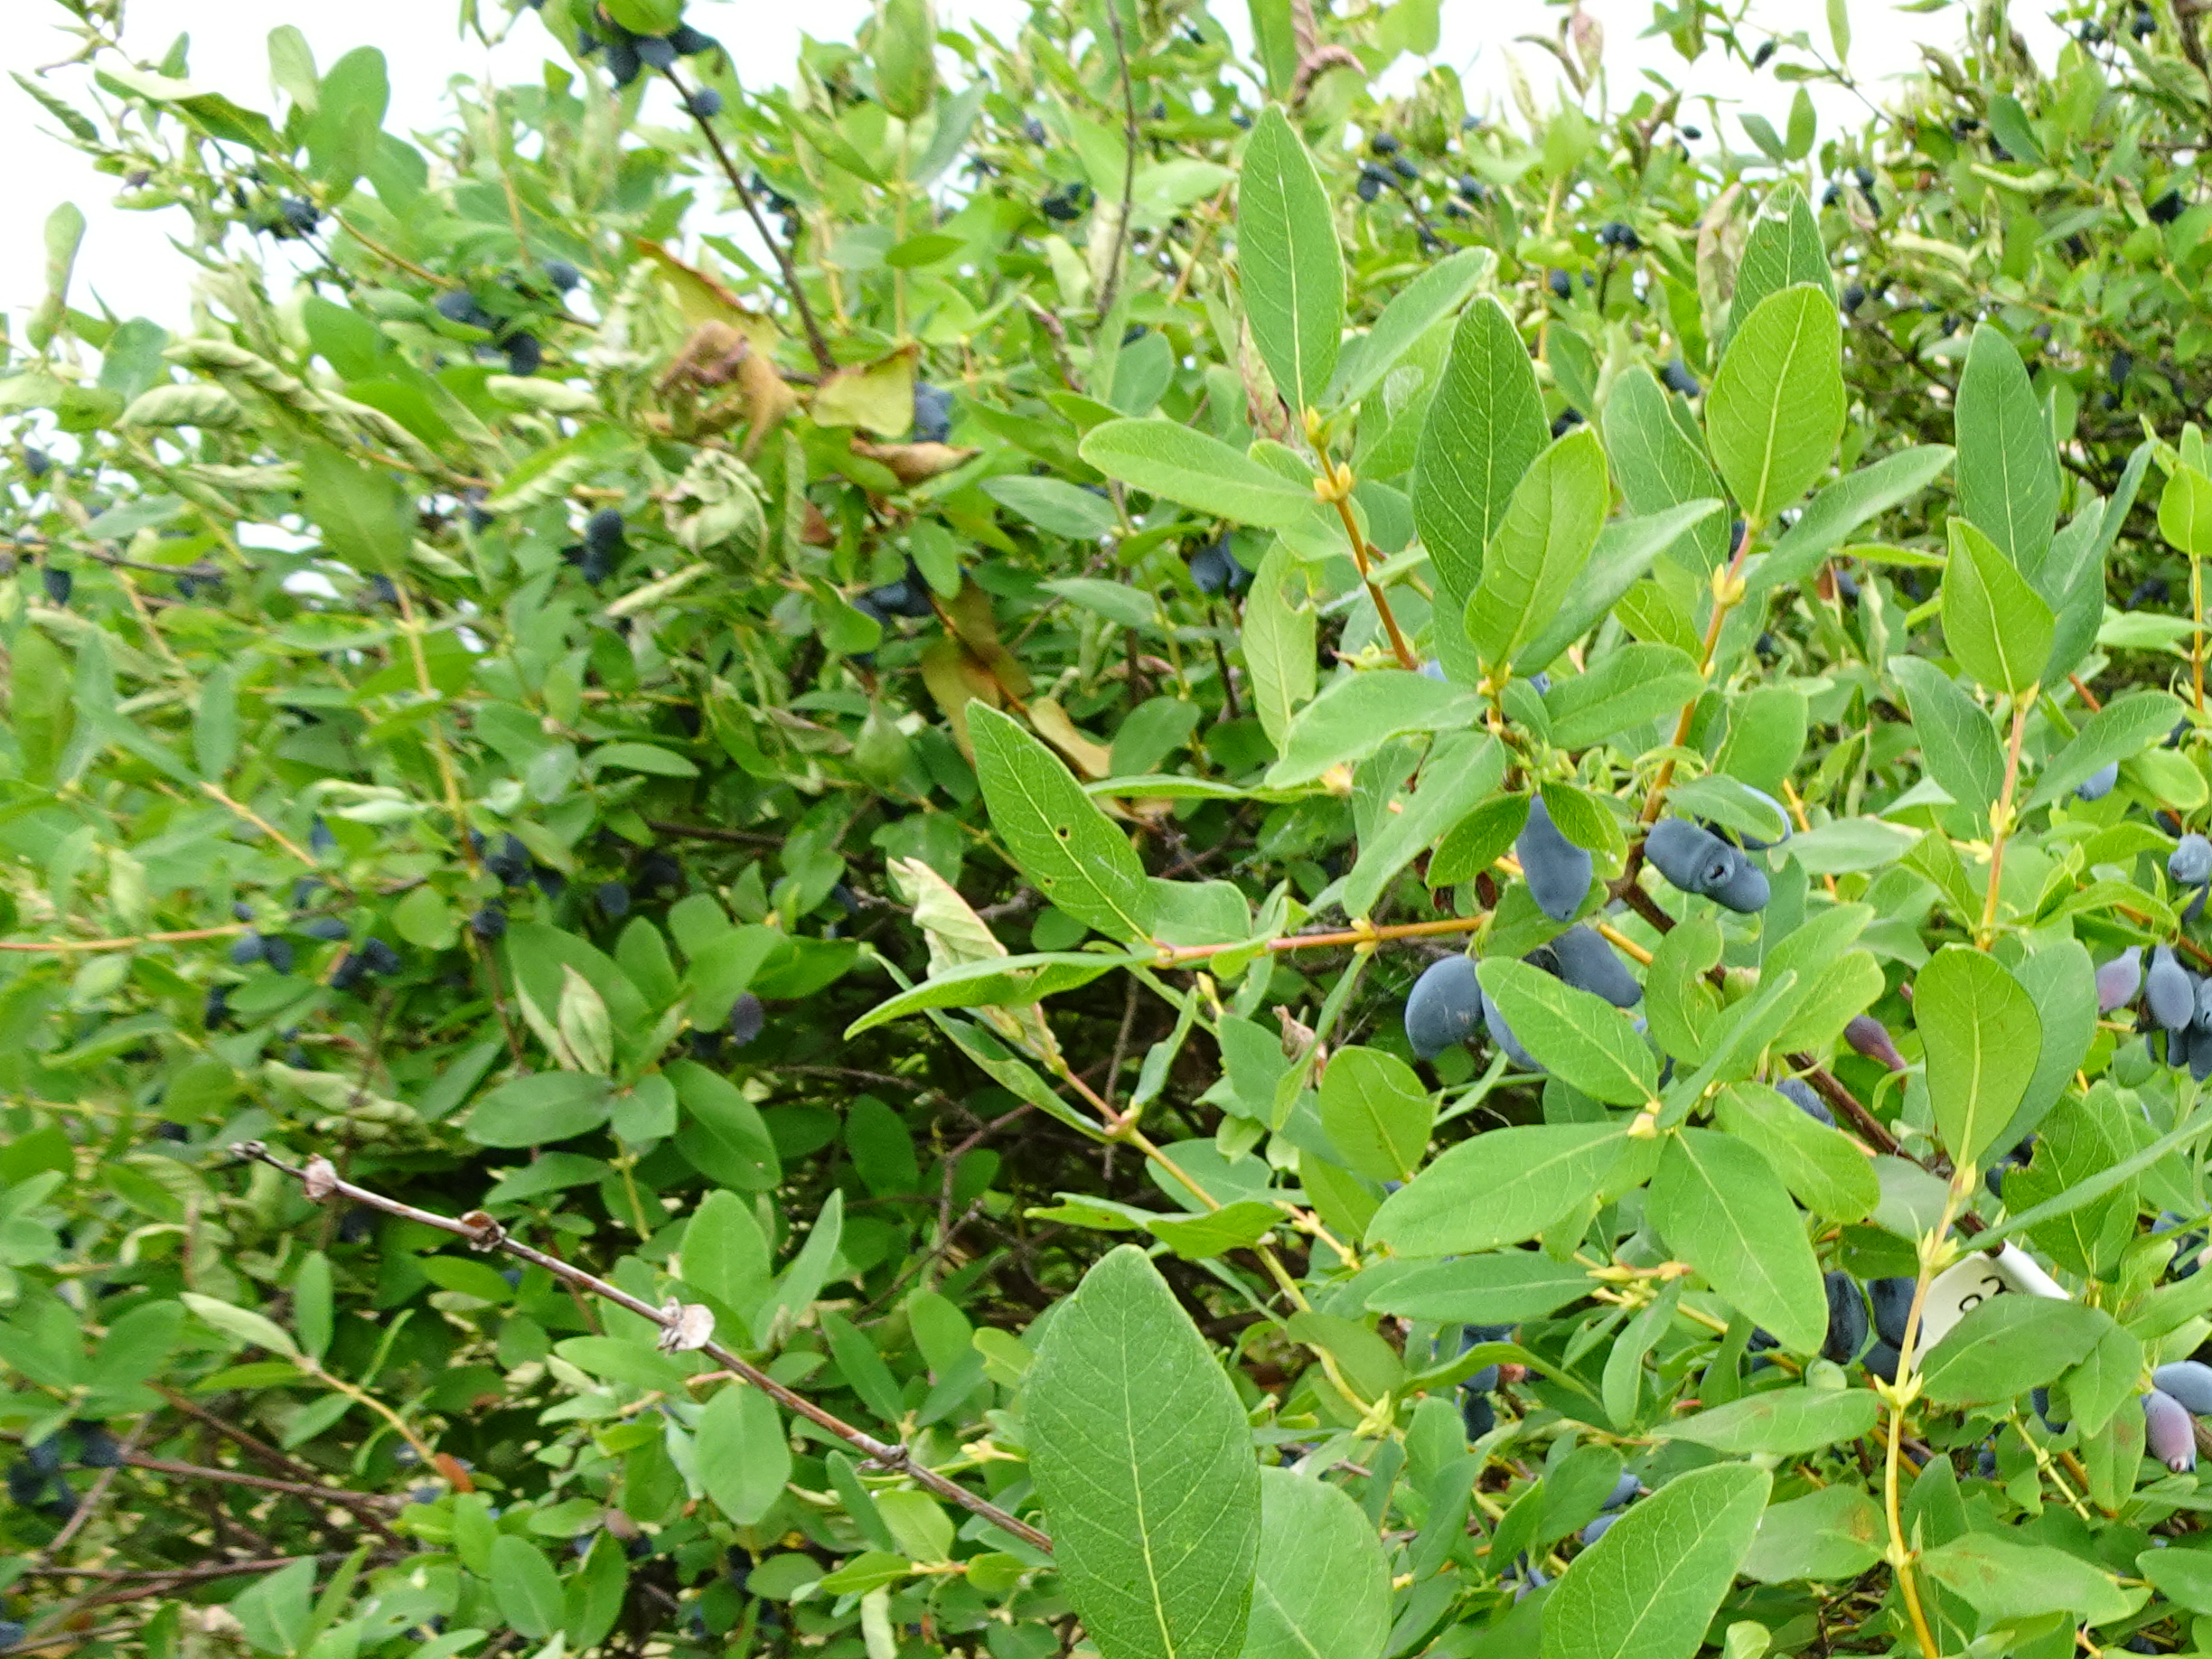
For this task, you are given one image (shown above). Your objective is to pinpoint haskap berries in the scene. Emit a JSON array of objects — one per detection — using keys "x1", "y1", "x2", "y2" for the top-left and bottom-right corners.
[
  {"x1": 1980, "y1": 1435, "x2": 2002, "y2": 1473},
  {"x1": 2101, "y1": 395, "x2": 2120, "y2": 411},
  {"x1": 1602, "y1": 220, "x2": 1621, "y2": 242},
  {"x1": 1859, "y1": 167, "x2": 1875, "y2": 184},
  {"x1": 598, "y1": 883, "x2": 629, "y2": 913},
  {"x1": 1806, "y1": 1358, "x2": 1848, "y2": 1395},
  {"x1": 1388, "y1": 154, "x2": 1417, "y2": 176},
  {"x1": 1926, "y1": 302, "x2": 1941, "y2": 313},
  {"x1": 1619, "y1": 228, "x2": 1640, "y2": 249},
  {"x1": 277, "y1": 202, "x2": 322, "y2": 234},
  {"x1": 1458, "y1": 1323, "x2": 1498, "y2": 1392},
  {"x1": 346, "y1": 1206, "x2": 367, "y2": 1236},
  {"x1": 2184, "y1": 887, "x2": 2210, "y2": 922},
  {"x1": 2110, "y1": 353, "x2": 2126, "y2": 381},
  {"x1": 854, "y1": 600, "x2": 879, "y2": 661},
  {"x1": 1219, "y1": 538, "x2": 1245, "y2": 585},
  {"x1": 472, "y1": 905, "x2": 505, "y2": 936},
  {"x1": 487, "y1": 838, "x2": 526, "y2": 874},
  {"x1": 914, "y1": 395, "x2": 953, "y2": 440},
  {"x1": 78, "y1": 1425, "x2": 129, "y2": 1468},
  {"x1": 1527, "y1": 1568, "x2": 1550, "y2": 1588},
  {"x1": 435, "y1": 293, "x2": 473, "y2": 321},
  {"x1": 1503, "y1": 1554, "x2": 1527, "y2": 1577},
  {"x1": 471, "y1": 831, "x2": 484, "y2": 842},
  {"x1": 2150, "y1": 191, "x2": 2179, "y2": 222},
  {"x1": 1488, "y1": 1467, "x2": 1511, "y2": 1489},
  {"x1": 1423, "y1": 661, "x2": 1446, "y2": 681},
  {"x1": 1942, "y1": 314, "x2": 1960, "y2": 336},
  {"x1": 512, "y1": 869, "x2": 562, "y2": 894},
  {"x1": 1048, "y1": 184, "x2": 1098, "y2": 216},
  {"x1": 1459, "y1": 177, "x2": 1481, "y2": 194},
  {"x1": 1670, "y1": 362, "x2": 1699, "y2": 397},
  {"x1": 2195, "y1": 978, "x2": 2212, "y2": 1038},
  {"x1": 1731, "y1": 519, "x2": 1746, "y2": 550},
  {"x1": 2147, "y1": 941, "x2": 2190, "y2": 1033},
  {"x1": 1527, "y1": 944, "x2": 1561, "y2": 970},
  {"x1": 94, "y1": 1284, "x2": 130, "y2": 1299},
  {"x1": 635, "y1": 37, "x2": 678, "y2": 66},
  {"x1": 2180, "y1": 1231, "x2": 2207, "y2": 1278},
  {"x1": 286, "y1": 1048, "x2": 309, "y2": 1068},
  {"x1": 1121, "y1": 324, "x2": 1149, "y2": 344},
  {"x1": 901, "y1": 583, "x2": 936, "y2": 618},
  {"x1": 503, "y1": 1268, "x2": 521, "y2": 1286},
  {"x1": 2149, "y1": 1363, "x2": 2212, "y2": 1411},
  {"x1": 1582, "y1": 274, "x2": 1592, "y2": 285},
  {"x1": 1870, "y1": 1271, "x2": 1923, "y2": 1349},
  {"x1": 310, "y1": 822, "x2": 333, "y2": 848},
  {"x1": 732, "y1": 993, "x2": 760, "y2": 1042},
  {"x1": 2037, "y1": 1382, "x2": 2072, "y2": 1433},
  {"x1": 1823, "y1": 186, "x2": 1845, "y2": 205},
  {"x1": 1551, "y1": 273, "x2": 1572, "y2": 297},
  {"x1": 2036, "y1": 324, "x2": 2051, "y2": 337},
  {"x1": 2152, "y1": 1208, "x2": 2193, "y2": 1259},
  {"x1": 1752, "y1": 1330, "x2": 1777, "y2": 1348},
  {"x1": 30, "y1": 1436, "x2": 60, "y2": 1473},
  {"x1": 1756, "y1": 42, "x2": 1776, "y2": 66},
  {"x1": 696, "y1": 1032, "x2": 721, "y2": 1053},
  {"x1": 1779, "y1": 1077, "x2": 1832, "y2": 1123},
  {"x1": 578, "y1": 30, "x2": 595, "y2": 52},
  {"x1": 753, "y1": 174, "x2": 766, "y2": 193},
  {"x1": 769, "y1": 194, "x2": 791, "y2": 212},
  {"x1": 298, "y1": 875, "x2": 327, "y2": 903},
  {"x1": 2167, "y1": 720, "x2": 2189, "y2": 745},
  {"x1": 1208, "y1": 855, "x2": 1231, "y2": 870},
  {"x1": 2080, "y1": 21, "x2": 2094, "y2": 41},
  {"x1": 264, "y1": 938, "x2": 292, "y2": 972},
  {"x1": 1988, "y1": 136, "x2": 2010, "y2": 161},
  {"x1": 58, "y1": 1230, "x2": 74, "y2": 1246},
  {"x1": 1548, "y1": 421, "x2": 1570, "y2": 438},
  {"x1": 0, "y1": 1624, "x2": 23, "y2": 1645},
  {"x1": 629, "y1": 1532, "x2": 656, "y2": 1555},
  {"x1": 1752, "y1": 1358, "x2": 1770, "y2": 1371},
  {"x1": 1520, "y1": 813, "x2": 1595, "y2": 917},
  {"x1": 2142, "y1": 1387, "x2": 2198, "y2": 1471},
  {"x1": 1825, "y1": 1271, "x2": 1867, "y2": 1361},
  {"x1": 1706, "y1": 856, "x2": 1770, "y2": 911},
  {"x1": 1957, "y1": 116, "x2": 1980, "y2": 130},
  {"x1": 642, "y1": 860, "x2": 680, "y2": 886},
  {"x1": 472, "y1": 491, "x2": 493, "y2": 527},
  {"x1": 686, "y1": 1570, "x2": 749, "y2": 1637},
  {"x1": 2126, "y1": 577, "x2": 2169, "y2": 607},
  {"x1": 1755, "y1": 635, "x2": 1770, "y2": 654},
  {"x1": 873, "y1": 583, "x2": 906, "y2": 607},
  {"x1": 1865, "y1": 1343, "x2": 1900, "y2": 1385},
  {"x1": 1585, "y1": 1513, "x2": 1623, "y2": 1543},
  {"x1": 2168, "y1": 1028, "x2": 2195, "y2": 1065},
  {"x1": 311, "y1": 920, "x2": 351, "y2": 937},
  {"x1": 672, "y1": 24, "x2": 718, "y2": 49},
  {"x1": 509, "y1": 336, "x2": 541, "y2": 372},
  {"x1": 2078, "y1": 760, "x2": 2124, "y2": 801},
  {"x1": 1722, "y1": 791, "x2": 1792, "y2": 849},
  {"x1": 585, "y1": 507, "x2": 624, "y2": 582},
  {"x1": 330, "y1": 952, "x2": 365, "y2": 989},
  {"x1": 2087, "y1": 937, "x2": 2147, "y2": 1018},
  {"x1": 1873, "y1": 279, "x2": 1891, "y2": 296},
  {"x1": 365, "y1": 938, "x2": 403, "y2": 974},
  {"x1": 2166, "y1": 832, "x2": 2212, "y2": 883},
  {"x1": 547, "y1": 263, "x2": 580, "y2": 287},
  {"x1": 1984, "y1": 1156, "x2": 2023, "y2": 1196},
  {"x1": 832, "y1": 883, "x2": 862, "y2": 916},
  {"x1": 2189, "y1": 1028, "x2": 2212, "y2": 1080},
  {"x1": 153, "y1": 1126, "x2": 188, "y2": 1139},
  {"x1": 1562, "y1": 408, "x2": 1580, "y2": 422},
  {"x1": 1904, "y1": 1448, "x2": 1924, "y2": 1465},
  {"x1": 207, "y1": 1002, "x2": 229, "y2": 1031},
  {"x1": 2147, "y1": 1038, "x2": 2158, "y2": 1061},
  {"x1": 10, "y1": 1462, "x2": 46, "y2": 1505},
  {"x1": 36, "y1": 1476, "x2": 80, "y2": 1516},
  {"x1": 1559, "y1": 927, "x2": 1640, "y2": 1006},
  {"x1": 1683, "y1": 128, "x2": 1701, "y2": 138},
  {"x1": 42, "y1": 565, "x2": 71, "y2": 601},
  {"x1": 2107, "y1": 454, "x2": 2126, "y2": 474},
  {"x1": 1191, "y1": 550, "x2": 1223, "y2": 589},
  {"x1": 1370, "y1": 134, "x2": 1399, "y2": 153},
  {"x1": 1648, "y1": 818, "x2": 1734, "y2": 891},
  {"x1": 178, "y1": 578, "x2": 197, "y2": 598},
  {"x1": 2, "y1": 557, "x2": 20, "y2": 574},
  {"x1": 1357, "y1": 168, "x2": 1375, "y2": 200},
  {"x1": 2066, "y1": 236, "x2": 2082, "y2": 253},
  {"x1": 1591, "y1": 1474, "x2": 1639, "y2": 1505},
  {"x1": 211, "y1": 982, "x2": 235, "y2": 997},
  {"x1": 1847, "y1": 1015, "x2": 1898, "y2": 1069},
  {"x1": 2008, "y1": 1132, "x2": 2045, "y2": 1164},
  {"x1": 376, "y1": 576, "x2": 396, "y2": 600},
  {"x1": 26, "y1": 449, "x2": 45, "y2": 474},
  {"x1": 417, "y1": 1488, "x2": 442, "y2": 1504},
  {"x1": 233, "y1": 903, "x2": 250, "y2": 920},
  {"x1": 2129, "y1": 1637, "x2": 2157, "y2": 1654},
  {"x1": 1319, "y1": 850, "x2": 1343, "y2": 881},
  {"x1": 1402, "y1": 958, "x2": 1482, "y2": 1055},
  {"x1": 2139, "y1": 15, "x2": 2159, "y2": 30},
  {"x1": 1530, "y1": 672, "x2": 1550, "y2": 694},
  {"x1": 230, "y1": 934, "x2": 266, "y2": 962},
  {"x1": 691, "y1": 90, "x2": 723, "y2": 113},
  {"x1": 1461, "y1": 1398, "x2": 1492, "y2": 1445},
  {"x1": 603, "y1": 44, "x2": 639, "y2": 83},
  {"x1": 1900, "y1": 570, "x2": 1923, "y2": 598},
  {"x1": 575, "y1": 1535, "x2": 594, "y2": 1551},
  {"x1": 1838, "y1": 571, "x2": 1856, "y2": 595},
  {"x1": 1487, "y1": 999, "x2": 1532, "y2": 1068},
  {"x1": 606, "y1": 1510, "x2": 642, "y2": 1540},
  {"x1": 1840, "y1": 286, "x2": 1864, "y2": 311}
]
